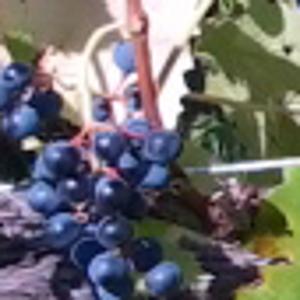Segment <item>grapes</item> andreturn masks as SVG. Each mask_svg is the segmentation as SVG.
I'll use <instances>...</instances> for the list:
<instances>
[{
	"label": "grapes",
	"mask_w": 300,
	"mask_h": 300,
	"mask_svg": "<svg viewBox=\"0 0 300 300\" xmlns=\"http://www.w3.org/2000/svg\"><path fill=\"white\" fill-rule=\"evenodd\" d=\"M92 117L73 140L52 138L33 158L27 206L42 214L45 243L70 251L96 300H128L136 291L128 272L145 275L153 297L175 294L184 285L181 265L164 261L160 241L135 233L146 214L144 189L166 191L183 151L182 134L131 117L122 128L109 121L111 101L90 99Z\"/></svg>",
	"instance_id": "grapes-1"
},
{
	"label": "grapes",
	"mask_w": 300,
	"mask_h": 300,
	"mask_svg": "<svg viewBox=\"0 0 300 300\" xmlns=\"http://www.w3.org/2000/svg\"><path fill=\"white\" fill-rule=\"evenodd\" d=\"M34 68L28 61H16L0 70V134L25 139L34 134L42 120L57 118L63 100L52 90H37Z\"/></svg>",
	"instance_id": "grapes-2"
},
{
	"label": "grapes",
	"mask_w": 300,
	"mask_h": 300,
	"mask_svg": "<svg viewBox=\"0 0 300 300\" xmlns=\"http://www.w3.org/2000/svg\"><path fill=\"white\" fill-rule=\"evenodd\" d=\"M113 62L129 74L136 72L134 64V43L130 38L122 39L112 48Z\"/></svg>",
	"instance_id": "grapes-3"
},
{
	"label": "grapes",
	"mask_w": 300,
	"mask_h": 300,
	"mask_svg": "<svg viewBox=\"0 0 300 300\" xmlns=\"http://www.w3.org/2000/svg\"><path fill=\"white\" fill-rule=\"evenodd\" d=\"M124 108L129 112H138L142 108L136 83H131L125 90Z\"/></svg>",
	"instance_id": "grapes-4"
}]
</instances>
